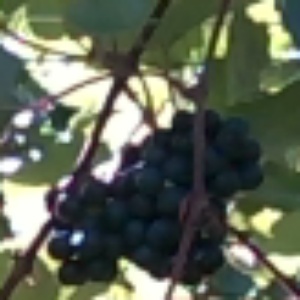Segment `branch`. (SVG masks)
<instances>
[{
  "mask_svg": "<svg viewBox=\"0 0 300 300\" xmlns=\"http://www.w3.org/2000/svg\"><path fill=\"white\" fill-rule=\"evenodd\" d=\"M229 0H223L218 18L208 39L204 53L201 81L197 86V102L194 118V184L188 194L178 202L184 225L181 245L175 265L171 269L172 282L163 300H173L183 269L194 260L193 250L201 240L213 239L216 243L225 240L227 207L207 186L206 177V118L208 86L214 52V44L224 23Z\"/></svg>",
  "mask_w": 300,
  "mask_h": 300,
  "instance_id": "30e6481e",
  "label": "branch"
},
{
  "mask_svg": "<svg viewBox=\"0 0 300 300\" xmlns=\"http://www.w3.org/2000/svg\"><path fill=\"white\" fill-rule=\"evenodd\" d=\"M171 3L172 0H156V8L151 14V17L140 30L127 52H107L105 54L106 61L114 67V81L109 86L105 101L102 103L101 113L96 120V127L92 132V138L86 142L79 162L72 169L74 174L80 177H86L91 173L92 161L97 152L99 135L119 97L121 86L124 84L126 78L137 73L140 65L138 56L158 26L166 8Z\"/></svg>",
  "mask_w": 300,
  "mask_h": 300,
  "instance_id": "325d2c04",
  "label": "branch"
},
{
  "mask_svg": "<svg viewBox=\"0 0 300 300\" xmlns=\"http://www.w3.org/2000/svg\"><path fill=\"white\" fill-rule=\"evenodd\" d=\"M55 221L49 219L45 226L35 237V240L27 247L24 256L16 259V272L8 280L5 287L0 291V300H6L14 284L22 274H31L33 272V261L39 247L48 239L54 228Z\"/></svg>",
  "mask_w": 300,
  "mask_h": 300,
  "instance_id": "170604dd",
  "label": "branch"
}]
</instances>
